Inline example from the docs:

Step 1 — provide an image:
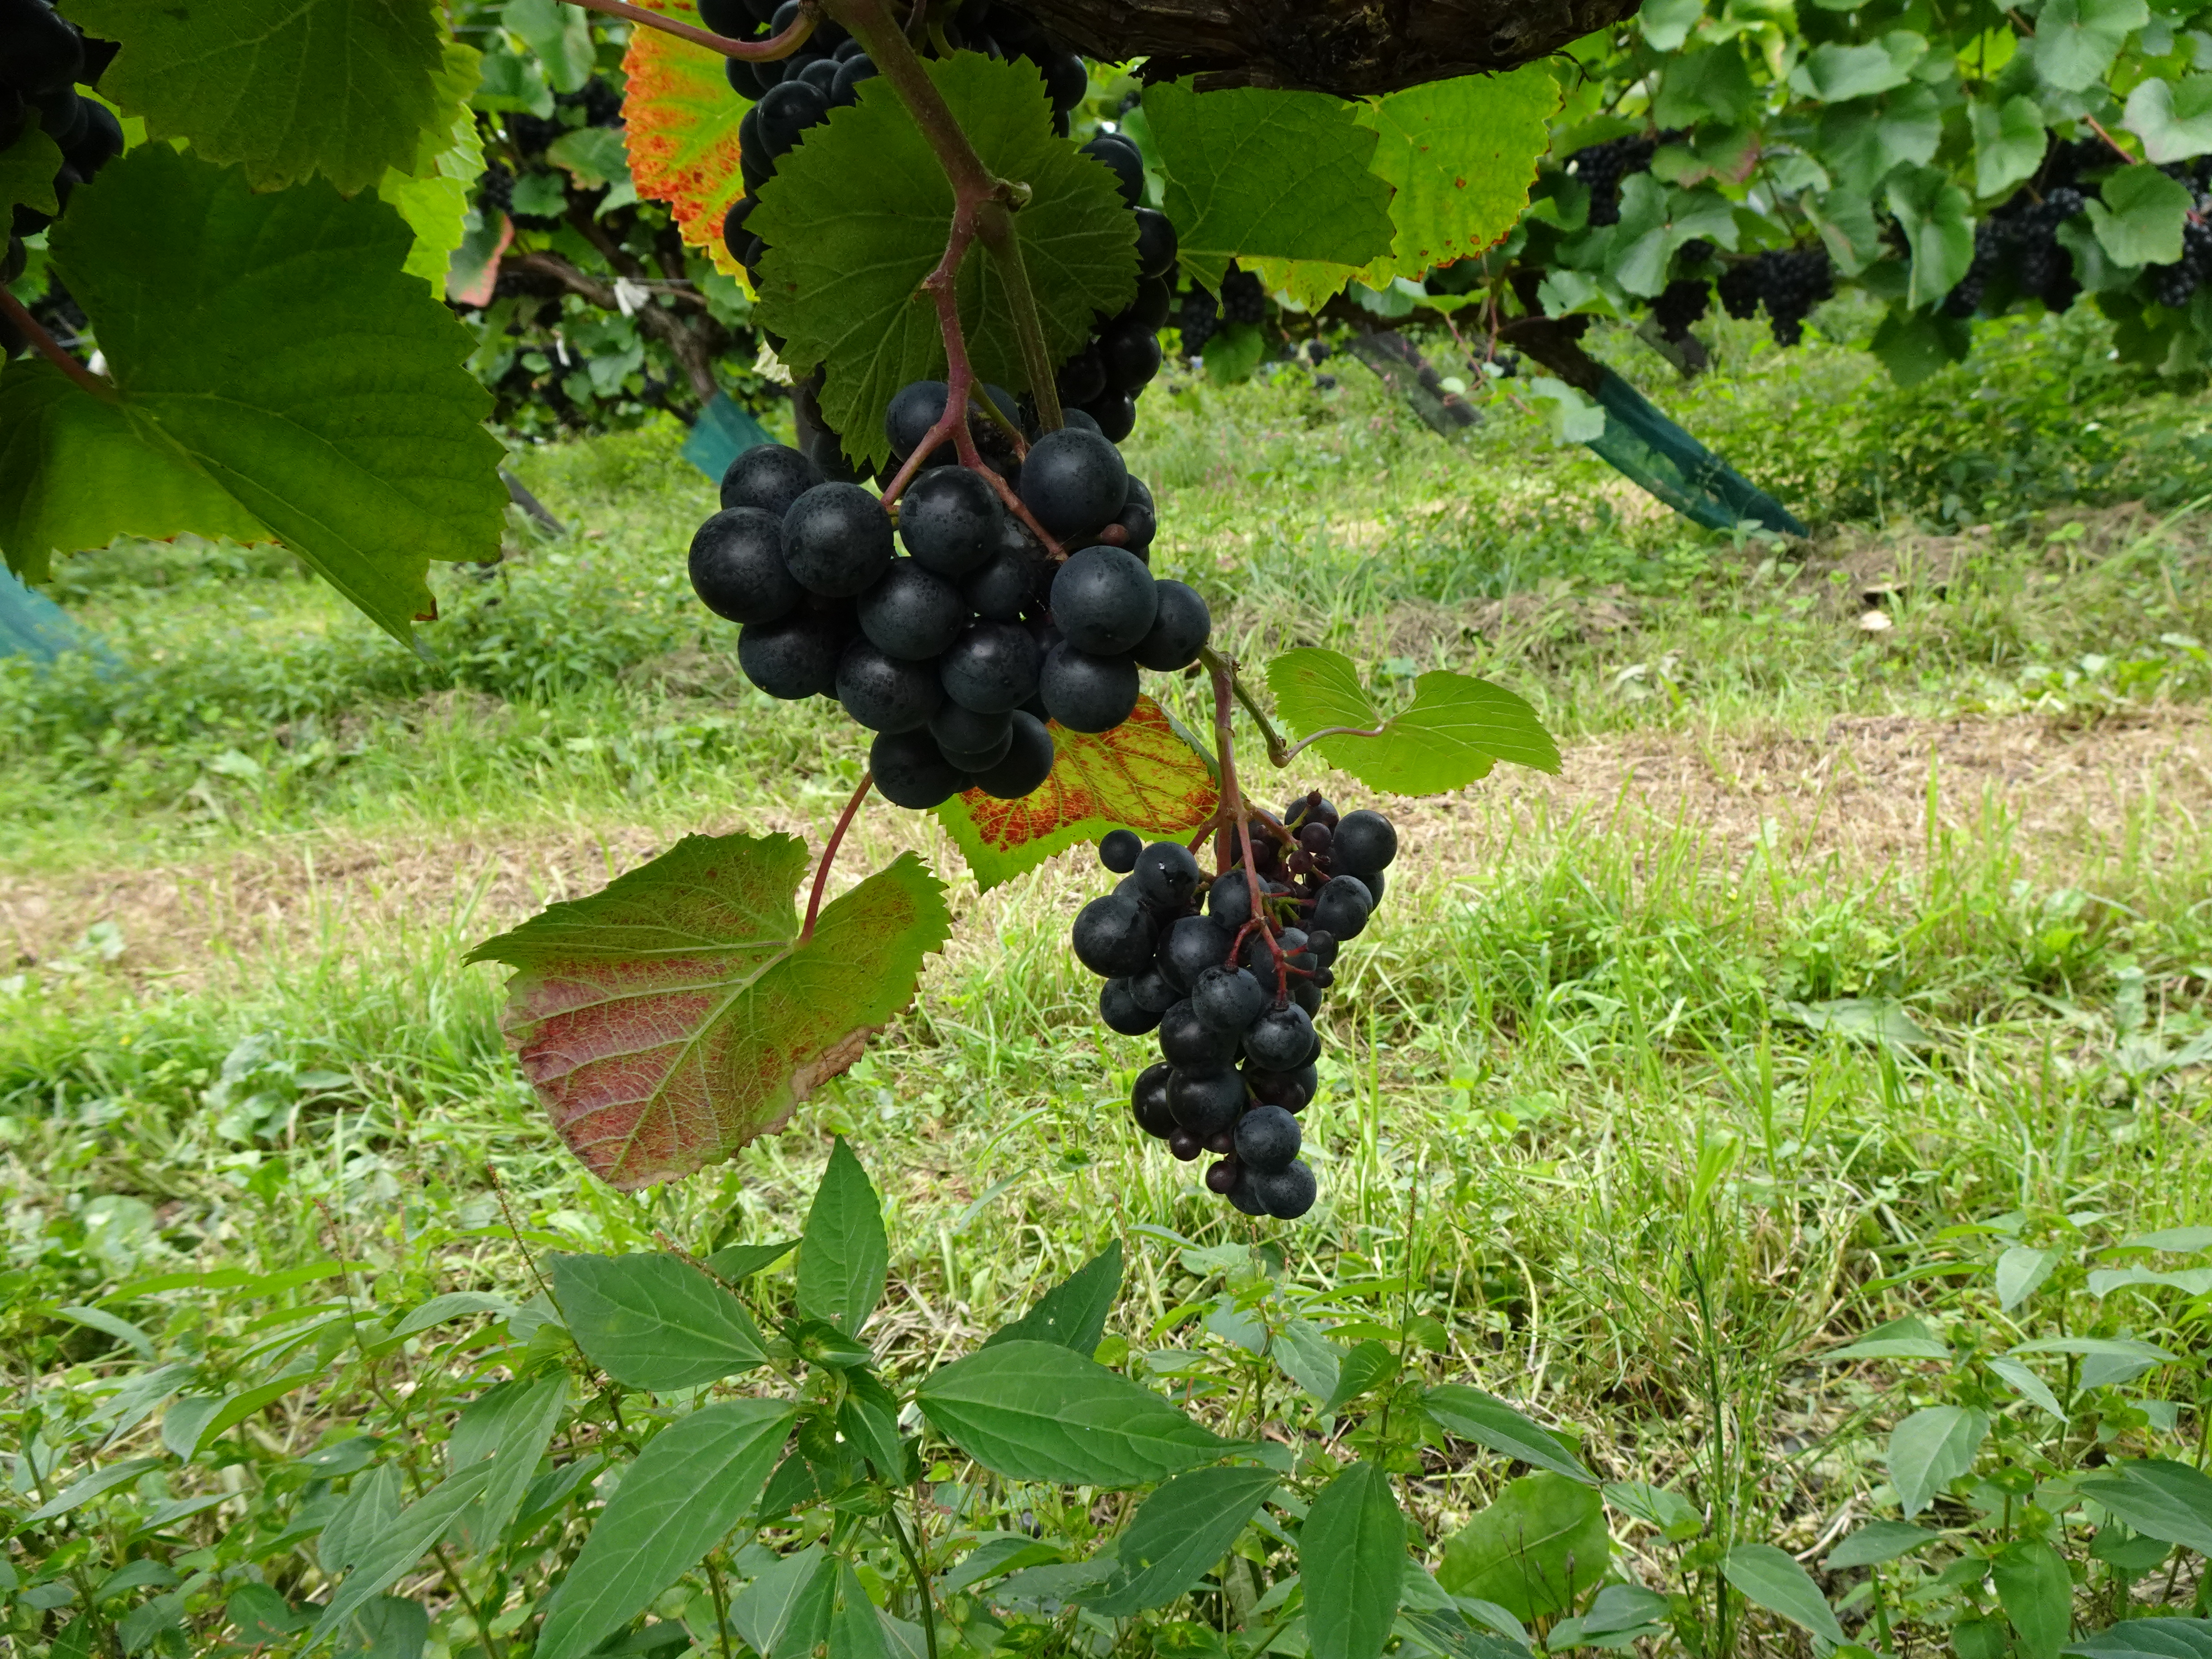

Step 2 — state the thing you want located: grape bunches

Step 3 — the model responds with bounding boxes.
[0,0,124,361]
[723,2,1086,500]
[1049,136,1179,446]
[1072,796,1397,1219]
[695,0,821,101]
[689,380,1210,809]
